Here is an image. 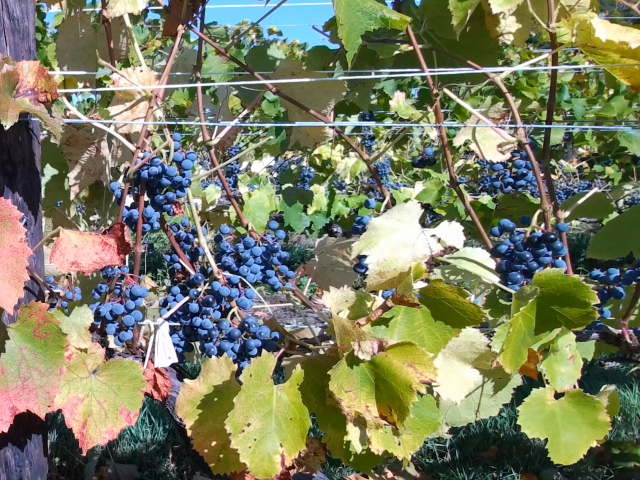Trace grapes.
Instances as JSON below:
<instances>
[{
    "label": "grapes",
    "mask_w": 640,
    "mask_h": 480,
    "mask_svg": "<svg viewBox=\"0 0 640 480\" xmlns=\"http://www.w3.org/2000/svg\"><path fill=\"white\" fill-rule=\"evenodd\" d=\"M513 167L518 170L516 177L513 171L508 169L503 162H496L492 166V171L499 174L500 178L493 181V187L501 194H510L514 191H522L527 182L533 180L530 160L524 150H514L512 152Z\"/></svg>",
    "instance_id": "obj_6"
},
{
    "label": "grapes",
    "mask_w": 640,
    "mask_h": 480,
    "mask_svg": "<svg viewBox=\"0 0 640 480\" xmlns=\"http://www.w3.org/2000/svg\"><path fill=\"white\" fill-rule=\"evenodd\" d=\"M590 277L599 280L602 284L617 285L620 283V269L617 267H609L607 271L602 272L599 268L592 269ZM639 277V273L635 269H628L624 272L621 284L611 289H600L597 297L602 305H606L611 299L622 300L626 298V288Z\"/></svg>",
    "instance_id": "obj_7"
},
{
    "label": "grapes",
    "mask_w": 640,
    "mask_h": 480,
    "mask_svg": "<svg viewBox=\"0 0 640 480\" xmlns=\"http://www.w3.org/2000/svg\"><path fill=\"white\" fill-rule=\"evenodd\" d=\"M163 260L172 265V267L176 270H180L182 268V264L179 261V256L177 254H165L163 256Z\"/></svg>",
    "instance_id": "obj_15"
},
{
    "label": "grapes",
    "mask_w": 640,
    "mask_h": 480,
    "mask_svg": "<svg viewBox=\"0 0 640 480\" xmlns=\"http://www.w3.org/2000/svg\"><path fill=\"white\" fill-rule=\"evenodd\" d=\"M505 232H514L509 239L497 243L492 249V256L503 258L495 270L502 281L514 291H520L523 282L530 283L535 271H543L546 265L565 268L563 258L568 253L557 236L548 232H533L526 240L524 230L515 231L516 223L509 218H502L497 226L490 229L492 237H500Z\"/></svg>",
    "instance_id": "obj_2"
},
{
    "label": "grapes",
    "mask_w": 640,
    "mask_h": 480,
    "mask_svg": "<svg viewBox=\"0 0 640 480\" xmlns=\"http://www.w3.org/2000/svg\"><path fill=\"white\" fill-rule=\"evenodd\" d=\"M170 293L171 294L169 296H165L158 302V305L160 306L159 314L161 316H166L174 306L184 300V295L182 294V288L180 286H172L170 288Z\"/></svg>",
    "instance_id": "obj_9"
},
{
    "label": "grapes",
    "mask_w": 640,
    "mask_h": 480,
    "mask_svg": "<svg viewBox=\"0 0 640 480\" xmlns=\"http://www.w3.org/2000/svg\"><path fill=\"white\" fill-rule=\"evenodd\" d=\"M109 190L112 192V195L116 198V204L118 206L119 198L122 190L120 189V185L116 182H111L109 184Z\"/></svg>",
    "instance_id": "obj_16"
},
{
    "label": "grapes",
    "mask_w": 640,
    "mask_h": 480,
    "mask_svg": "<svg viewBox=\"0 0 640 480\" xmlns=\"http://www.w3.org/2000/svg\"><path fill=\"white\" fill-rule=\"evenodd\" d=\"M423 157L420 159L414 158L412 160V166L414 168L425 169L427 166H434L436 164L434 149L430 146H426L423 149Z\"/></svg>",
    "instance_id": "obj_10"
},
{
    "label": "grapes",
    "mask_w": 640,
    "mask_h": 480,
    "mask_svg": "<svg viewBox=\"0 0 640 480\" xmlns=\"http://www.w3.org/2000/svg\"><path fill=\"white\" fill-rule=\"evenodd\" d=\"M226 277L227 287L222 286L218 280L211 282V291L213 295H206L202 301L198 303H186L176 308L167 321L185 322L186 327L177 331L173 327H169V336L175 348L177 361L185 363L187 357L184 353L192 352L195 344L192 341H199V351L207 353L209 356H216L220 350L225 352L229 358L238 363L241 369H245L250 363L251 358L258 355V350L262 347V341L271 339L278 342L281 334L277 331H271L266 325L256 323L254 317L245 316L242 319L243 326L254 334L256 339H249L245 342L240 339L241 331L234 328L228 321H221L213 324L209 319L211 316L215 320H220L222 314L220 305L229 309L227 299L234 300L244 310H249L253 305L256 297V291L253 288H246L244 291L237 286L240 278L231 274L228 270L223 272Z\"/></svg>",
    "instance_id": "obj_1"
},
{
    "label": "grapes",
    "mask_w": 640,
    "mask_h": 480,
    "mask_svg": "<svg viewBox=\"0 0 640 480\" xmlns=\"http://www.w3.org/2000/svg\"><path fill=\"white\" fill-rule=\"evenodd\" d=\"M268 228L274 232V236L276 239H285L286 238V231L284 229H278L279 228V223L275 220H270L268 222Z\"/></svg>",
    "instance_id": "obj_14"
},
{
    "label": "grapes",
    "mask_w": 640,
    "mask_h": 480,
    "mask_svg": "<svg viewBox=\"0 0 640 480\" xmlns=\"http://www.w3.org/2000/svg\"><path fill=\"white\" fill-rule=\"evenodd\" d=\"M127 302L118 303H90L88 308L94 314L93 324L99 326L103 318L108 322L105 326V333L112 335L113 342L117 346H122L125 342H131L134 336V328L138 321H142L144 313L137 307L143 304V299L149 296L146 286L128 285L124 290Z\"/></svg>",
    "instance_id": "obj_5"
},
{
    "label": "grapes",
    "mask_w": 640,
    "mask_h": 480,
    "mask_svg": "<svg viewBox=\"0 0 640 480\" xmlns=\"http://www.w3.org/2000/svg\"><path fill=\"white\" fill-rule=\"evenodd\" d=\"M138 214L137 202H132L130 206H125L123 213V222L127 224L130 229L136 228V219Z\"/></svg>",
    "instance_id": "obj_12"
},
{
    "label": "grapes",
    "mask_w": 640,
    "mask_h": 480,
    "mask_svg": "<svg viewBox=\"0 0 640 480\" xmlns=\"http://www.w3.org/2000/svg\"><path fill=\"white\" fill-rule=\"evenodd\" d=\"M129 272L130 269L127 266H121L119 269L107 267L101 272V277L103 279H109L110 277L119 278L121 275H126Z\"/></svg>",
    "instance_id": "obj_13"
},
{
    "label": "grapes",
    "mask_w": 640,
    "mask_h": 480,
    "mask_svg": "<svg viewBox=\"0 0 640 480\" xmlns=\"http://www.w3.org/2000/svg\"><path fill=\"white\" fill-rule=\"evenodd\" d=\"M182 134L179 132L172 134L174 142V155L172 161L178 163L182 169V176L177 175L174 167L161 164L159 157H152L149 162L145 163L139 174L141 179L147 181L148 197L150 207H145L144 219L147 223H143V232L158 230L160 223L158 217L162 213H167L169 217L175 216V210L170 201H175L178 197L186 196V187L192 184V168L193 162L197 159L195 151H188L186 156L182 152H177L181 148Z\"/></svg>",
    "instance_id": "obj_4"
},
{
    "label": "grapes",
    "mask_w": 640,
    "mask_h": 480,
    "mask_svg": "<svg viewBox=\"0 0 640 480\" xmlns=\"http://www.w3.org/2000/svg\"><path fill=\"white\" fill-rule=\"evenodd\" d=\"M219 232L214 236V242L220 245L222 253L219 255L220 264L223 267H230L232 271H239L242 278L247 282L256 283L262 281L264 284L271 286V289L279 293L283 287L290 290L293 287L291 282H281V279L272 269L277 266V273L280 276L286 275L287 279H295L296 272L288 268L282 263V259H289L291 253L283 250V247L277 242H272L271 234H266L265 238L269 242L262 244V247L255 246V240L252 237H241L239 242L232 245L228 241H224V236H229L232 229L228 224H221Z\"/></svg>",
    "instance_id": "obj_3"
},
{
    "label": "grapes",
    "mask_w": 640,
    "mask_h": 480,
    "mask_svg": "<svg viewBox=\"0 0 640 480\" xmlns=\"http://www.w3.org/2000/svg\"><path fill=\"white\" fill-rule=\"evenodd\" d=\"M64 298L66 300L61 301L59 307L65 309V313L69 312L68 301H78L81 302L83 300L82 296V288L80 286L74 287V291L71 289L65 290Z\"/></svg>",
    "instance_id": "obj_11"
},
{
    "label": "grapes",
    "mask_w": 640,
    "mask_h": 480,
    "mask_svg": "<svg viewBox=\"0 0 640 480\" xmlns=\"http://www.w3.org/2000/svg\"><path fill=\"white\" fill-rule=\"evenodd\" d=\"M189 225V219L187 217H183L179 222V225L177 223H172L170 228L189 261H197L199 256L204 255V252L202 251L201 246H196L194 244L196 234L193 224L190 226L189 232L180 229V226L182 228H186Z\"/></svg>",
    "instance_id": "obj_8"
},
{
    "label": "grapes",
    "mask_w": 640,
    "mask_h": 480,
    "mask_svg": "<svg viewBox=\"0 0 640 480\" xmlns=\"http://www.w3.org/2000/svg\"><path fill=\"white\" fill-rule=\"evenodd\" d=\"M45 281H46L48 284H51V285H50V290H51V291H54V290H61V289H62L61 287H59V286H57V285H53V284H52V283H54V281H55V278H54L53 276H47V277L45 278Z\"/></svg>",
    "instance_id": "obj_17"
}]
</instances>
